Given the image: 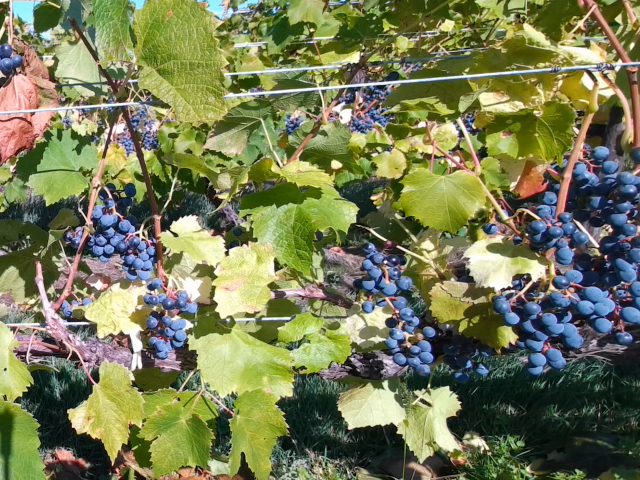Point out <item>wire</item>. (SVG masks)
<instances>
[{
  "label": "wire",
  "instance_id": "wire-1",
  "mask_svg": "<svg viewBox=\"0 0 640 480\" xmlns=\"http://www.w3.org/2000/svg\"><path fill=\"white\" fill-rule=\"evenodd\" d=\"M615 66H640V61H612L607 63H593L589 65H575V66H557L549 68H534V69H521L516 71H493L487 73H461V74H449L432 78H408L404 80H374L365 81L360 83H346L336 84L329 86H320L316 88H286V89H270L263 91H236L228 92L225 95L226 99L239 96H265L273 94H288V93H318L322 91H331L338 89L349 88H363L367 86L377 85H406L410 83H434L451 79H463V78H489L495 76H519L523 74H537V73H552L559 71H577V70H591L595 68H609Z\"/></svg>",
  "mask_w": 640,
  "mask_h": 480
},
{
  "label": "wire",
  "instance_id": "wire-2",
  "mask_svg": "<svg viewBox=\"0 0 640 480\" xmlns=\"http://www.w3.org/2000/svg\"><path fill=\"white\" fill-rule=\"evenodd\" d=\"M152 105L163 106L164 102L162 100H150L145 102H123L120 104H84L77 107H46L25 110H0V116L41 114L49 112H79L87 109H123L126 107H147Z\"/></svg>",
  "mask_w": 640,
  "mask_h": 480
},
{
  "label": "wire",
  "instance_id": "wire-3",
  "mask_svg": "<svg viewBox=\"0 0 640 480\" xmlns=\"http://www.w3.org/2000/svg\"><path fill=\"white\" fill-rule=\"evenodd\" d=\"M253 321L254 323H262V322H277V321H290L293 322L294 318L292 316H275V317H255V316H244V317H233V318H221V323H235V322H246Z\"/></svg>",
  "mask_w": 640,
  "mask_h": 480
}]
</instances>
